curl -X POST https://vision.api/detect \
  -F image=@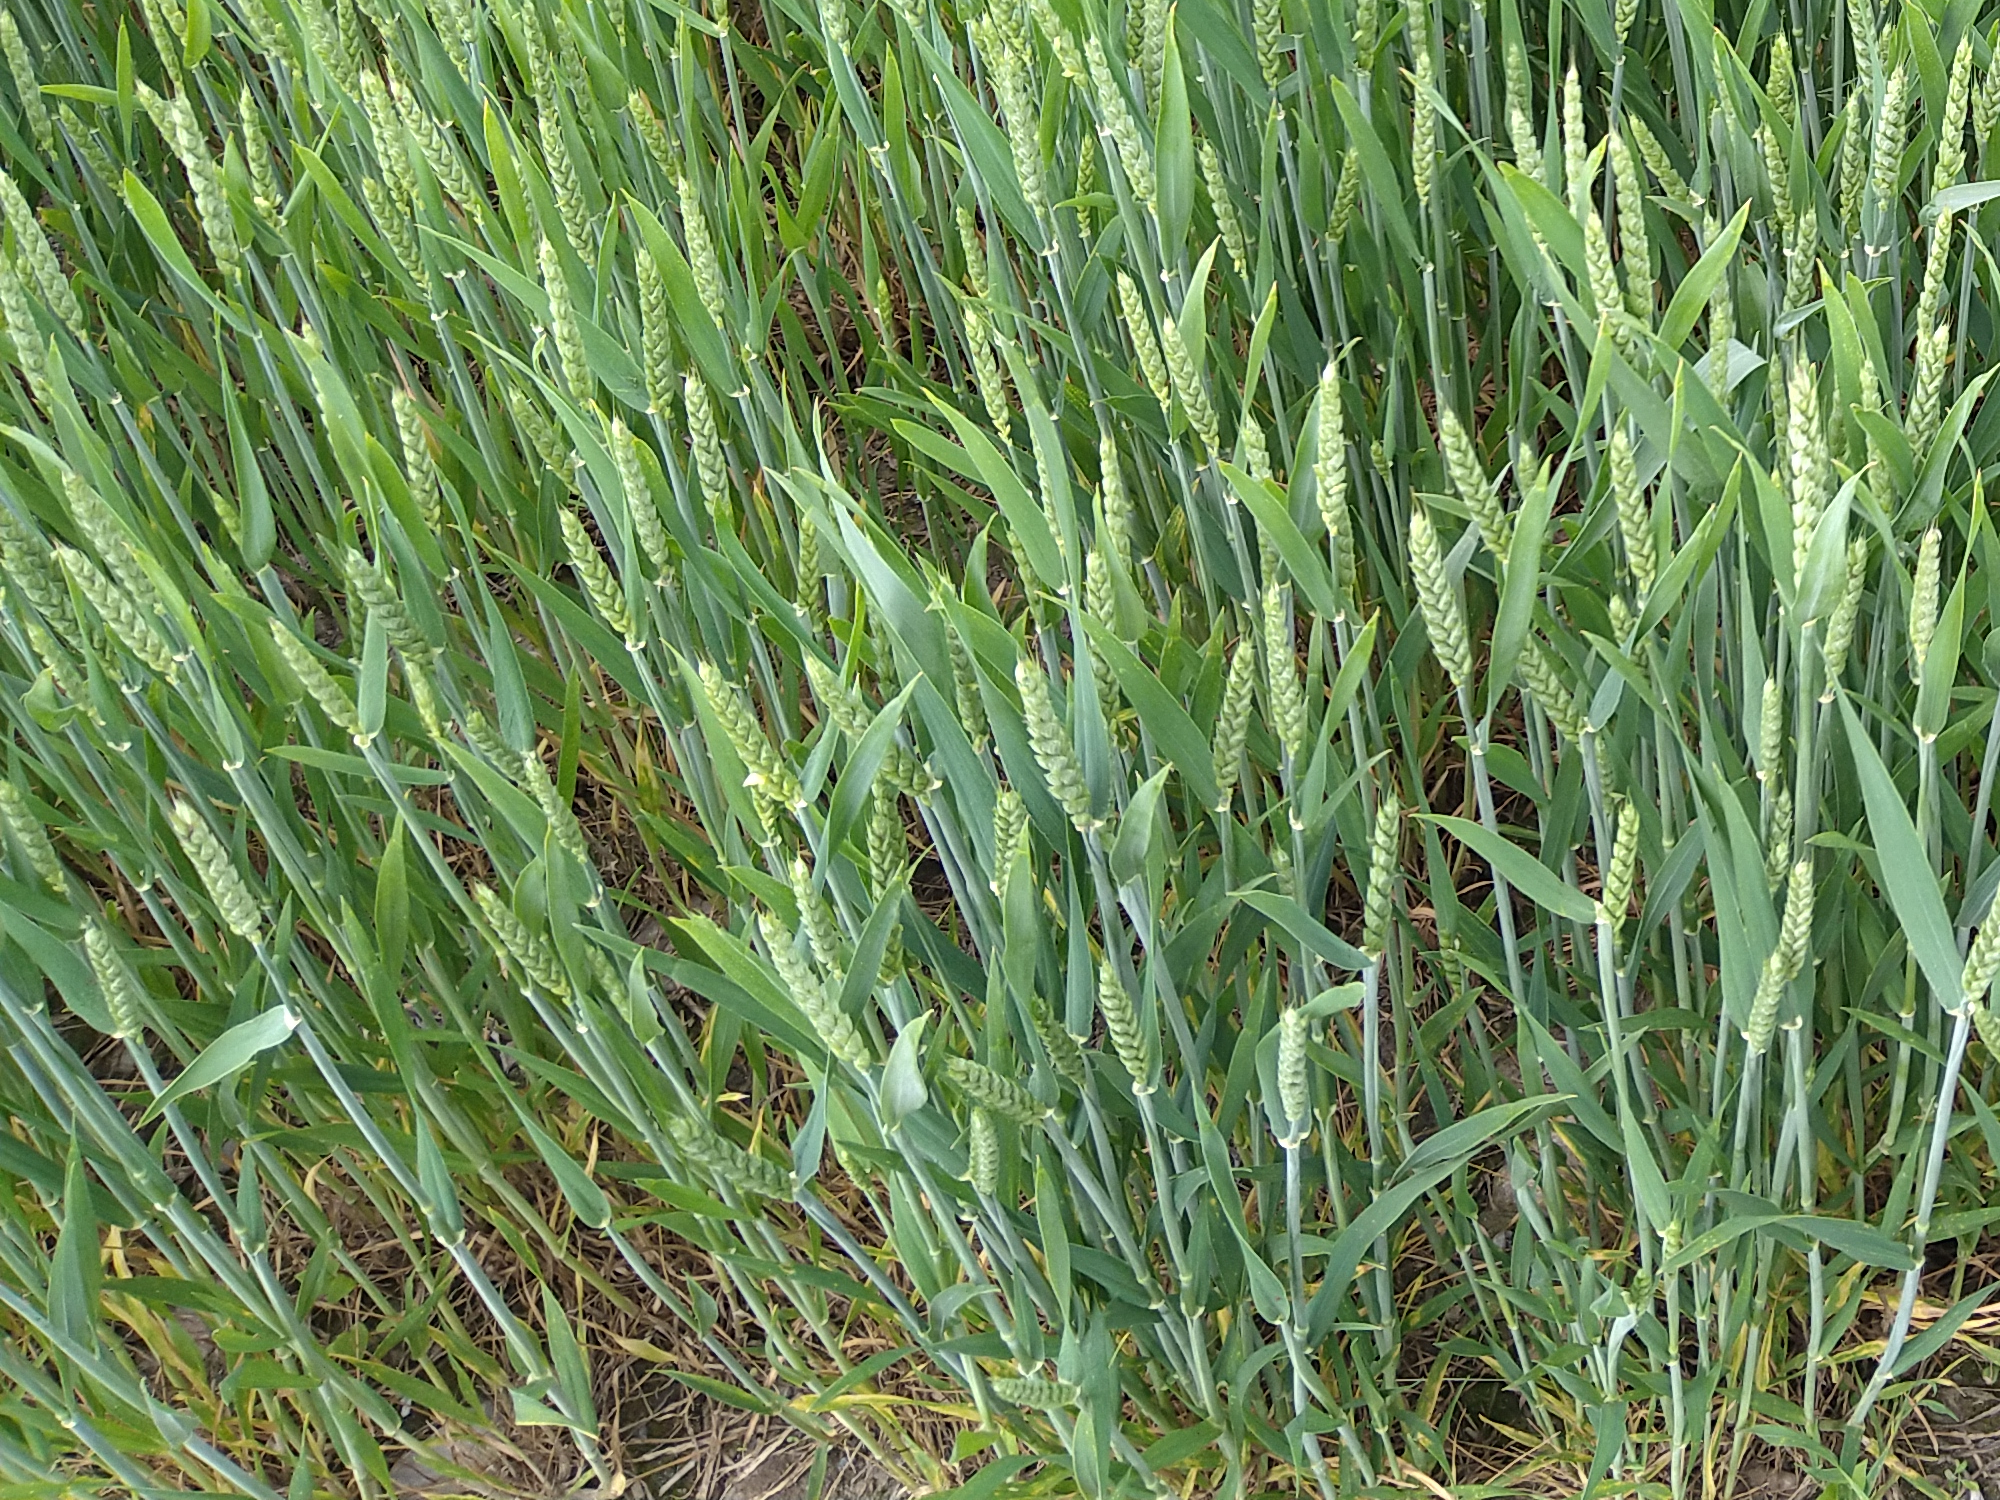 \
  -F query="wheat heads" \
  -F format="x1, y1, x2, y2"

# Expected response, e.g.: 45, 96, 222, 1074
112, 0, 185, 34
1934, 31, 1975, 195
293, 0, 352, 89
56, 546, 171, 671
1195, 134, 1253, 276
1564, 65, 1585, 198
745, 767, 777, 841
207, 485, 252, 560
1007, 522, 1046, 626
1609, 127, 1654, 328
335, 0, 364, 69
0, 9, 61, 168
1276, 1007, 1305, 1117
345, 548, 431, 666
520, 0, 560, 123
1329, 151, 1356, 241
1249, 0, 1281, 87
757, 912, 867, 1072
1629, 114, 1692, 209
268, 619, 358, 732
470, 879, 566, 1003
1317, 367, 1344, 512
1358, 0, 1375, 68
1124, 0, 1142, 57
989, 1374, 1086, 1411
1768, 37, 1796, 125
966, 12, 1029, 100
1613, 430, 1655, 602
464, 711, 531, 788
1766, 792, 1796, 882
1511, 45, 1528, 138
556, 509, 633, 641
0, 513, 133, 682
1762, 676, 1782, 812
1780, 862, 1813, 980
371, 77, 430, 211
1912, 525, 1942, 671
1757, 125, 1792, 251
1084, 42, 1159, 206
1858, 357, 1896, 515
675, 1110, 796, 1203
1606, 806, 1641, 931
301, 320, 337, 455
1845, 0, 1882, 91
412, 0, 470, 42
0, 250, 56, 408
1097, 432, 1133, 576
133, 87, 279, 223
1439, 408, 1512, 560
805, 646, 931, 792
519, 163, 542, 277
0, 780, 69, 894
1584, 208, 1626, 365
1404, 0, 1429, 66
802, 508, 832, 658
869, 820, 898, 980
1511, 110, 1557, 268
635, 249, 671, 419
785, 857, 844, 984
673, 0, 688, 49
61, 467, 167, 614
873, 613, 899, 702
1013, 660, 1110, 825
1434, 932, 1462, 1004
1007, 0, 1091, 82
1515, 439, 1536, 493
0, 171, 85, 329
390, 387, 443, 536
1322, 500, 1353, 611
1410, 513, 1472, 682
411, 0, 471, 73
1508, 633, 1580, 752
359, 183, 432, 297
1082, 552, 1117, 717
1870, 68, 1910, 196
963, 1105, 996, 1195
23, 621, 105, 721
1963, 858, 2000, 996
1906, 325, 1949, 460
1918, 202, 1949, 330
140, 0, 182, 87
345, 573, 365, 667
1968, 1003, 2000, 1064
1605, 599, 1646, 674
964, 310, 1004, 435
82, 923, 142, 1045
611, 416, 670, 566
1096, 954, 1147, 1077
1825, 536, 1866, 683
699, 664, 794, 800
876, 272, 897, 357
167, 804, 261, 927
525, 752, 589, 857
1029, 422, 1068, 548
552, 15, 595, 123
1588, 737, 1615, 837
1214, 642, 1253, 790
1613, 0, 1660, 43
942, 611, 989, 752
354, 68, 412, 228
1842, 87, 1862, 231
943, 1057, 1046, 1129
1029, 992, 1089, 1089
1163, 320, 1219, 454
1978, 2, 2000, 140
954, 200, 989, 304
401, 652, 443, 737
584, 944, 630, 1025
676, 187, 724, 326
1260, 585, 1302, 757
1080, 134, 1093, 255
1117, 269, 1166, 399
385, 76, 479, 216
956, 0, 1042, 76
583, 0, 624, 38
1786, 347, 1827, 584
536, 241, 600, 399
1701, 213, 1735, 349
232, 94, 284, 209
533, 118, 600, 269
1145, 0, 1170, 118
629, 91, 676, 184
513, 393, 578, 500
1365, 790, 1399, 956
993, 790, 1025, 903
168, 89, 240, 277
1766, 350, 1793, 487
1743, 942, 1784, 1054
232, 0, 299, 69
993, 97, 1049, 206
682, 373, 732, 515
58, 105, 127, 195
1782, 208, 1818, 324
1240, 410, 1288, 587
1414, 49, 1436, 202
1711, 36, 1744, 137
796, 0, 848, 53
706, 0, 728, 35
